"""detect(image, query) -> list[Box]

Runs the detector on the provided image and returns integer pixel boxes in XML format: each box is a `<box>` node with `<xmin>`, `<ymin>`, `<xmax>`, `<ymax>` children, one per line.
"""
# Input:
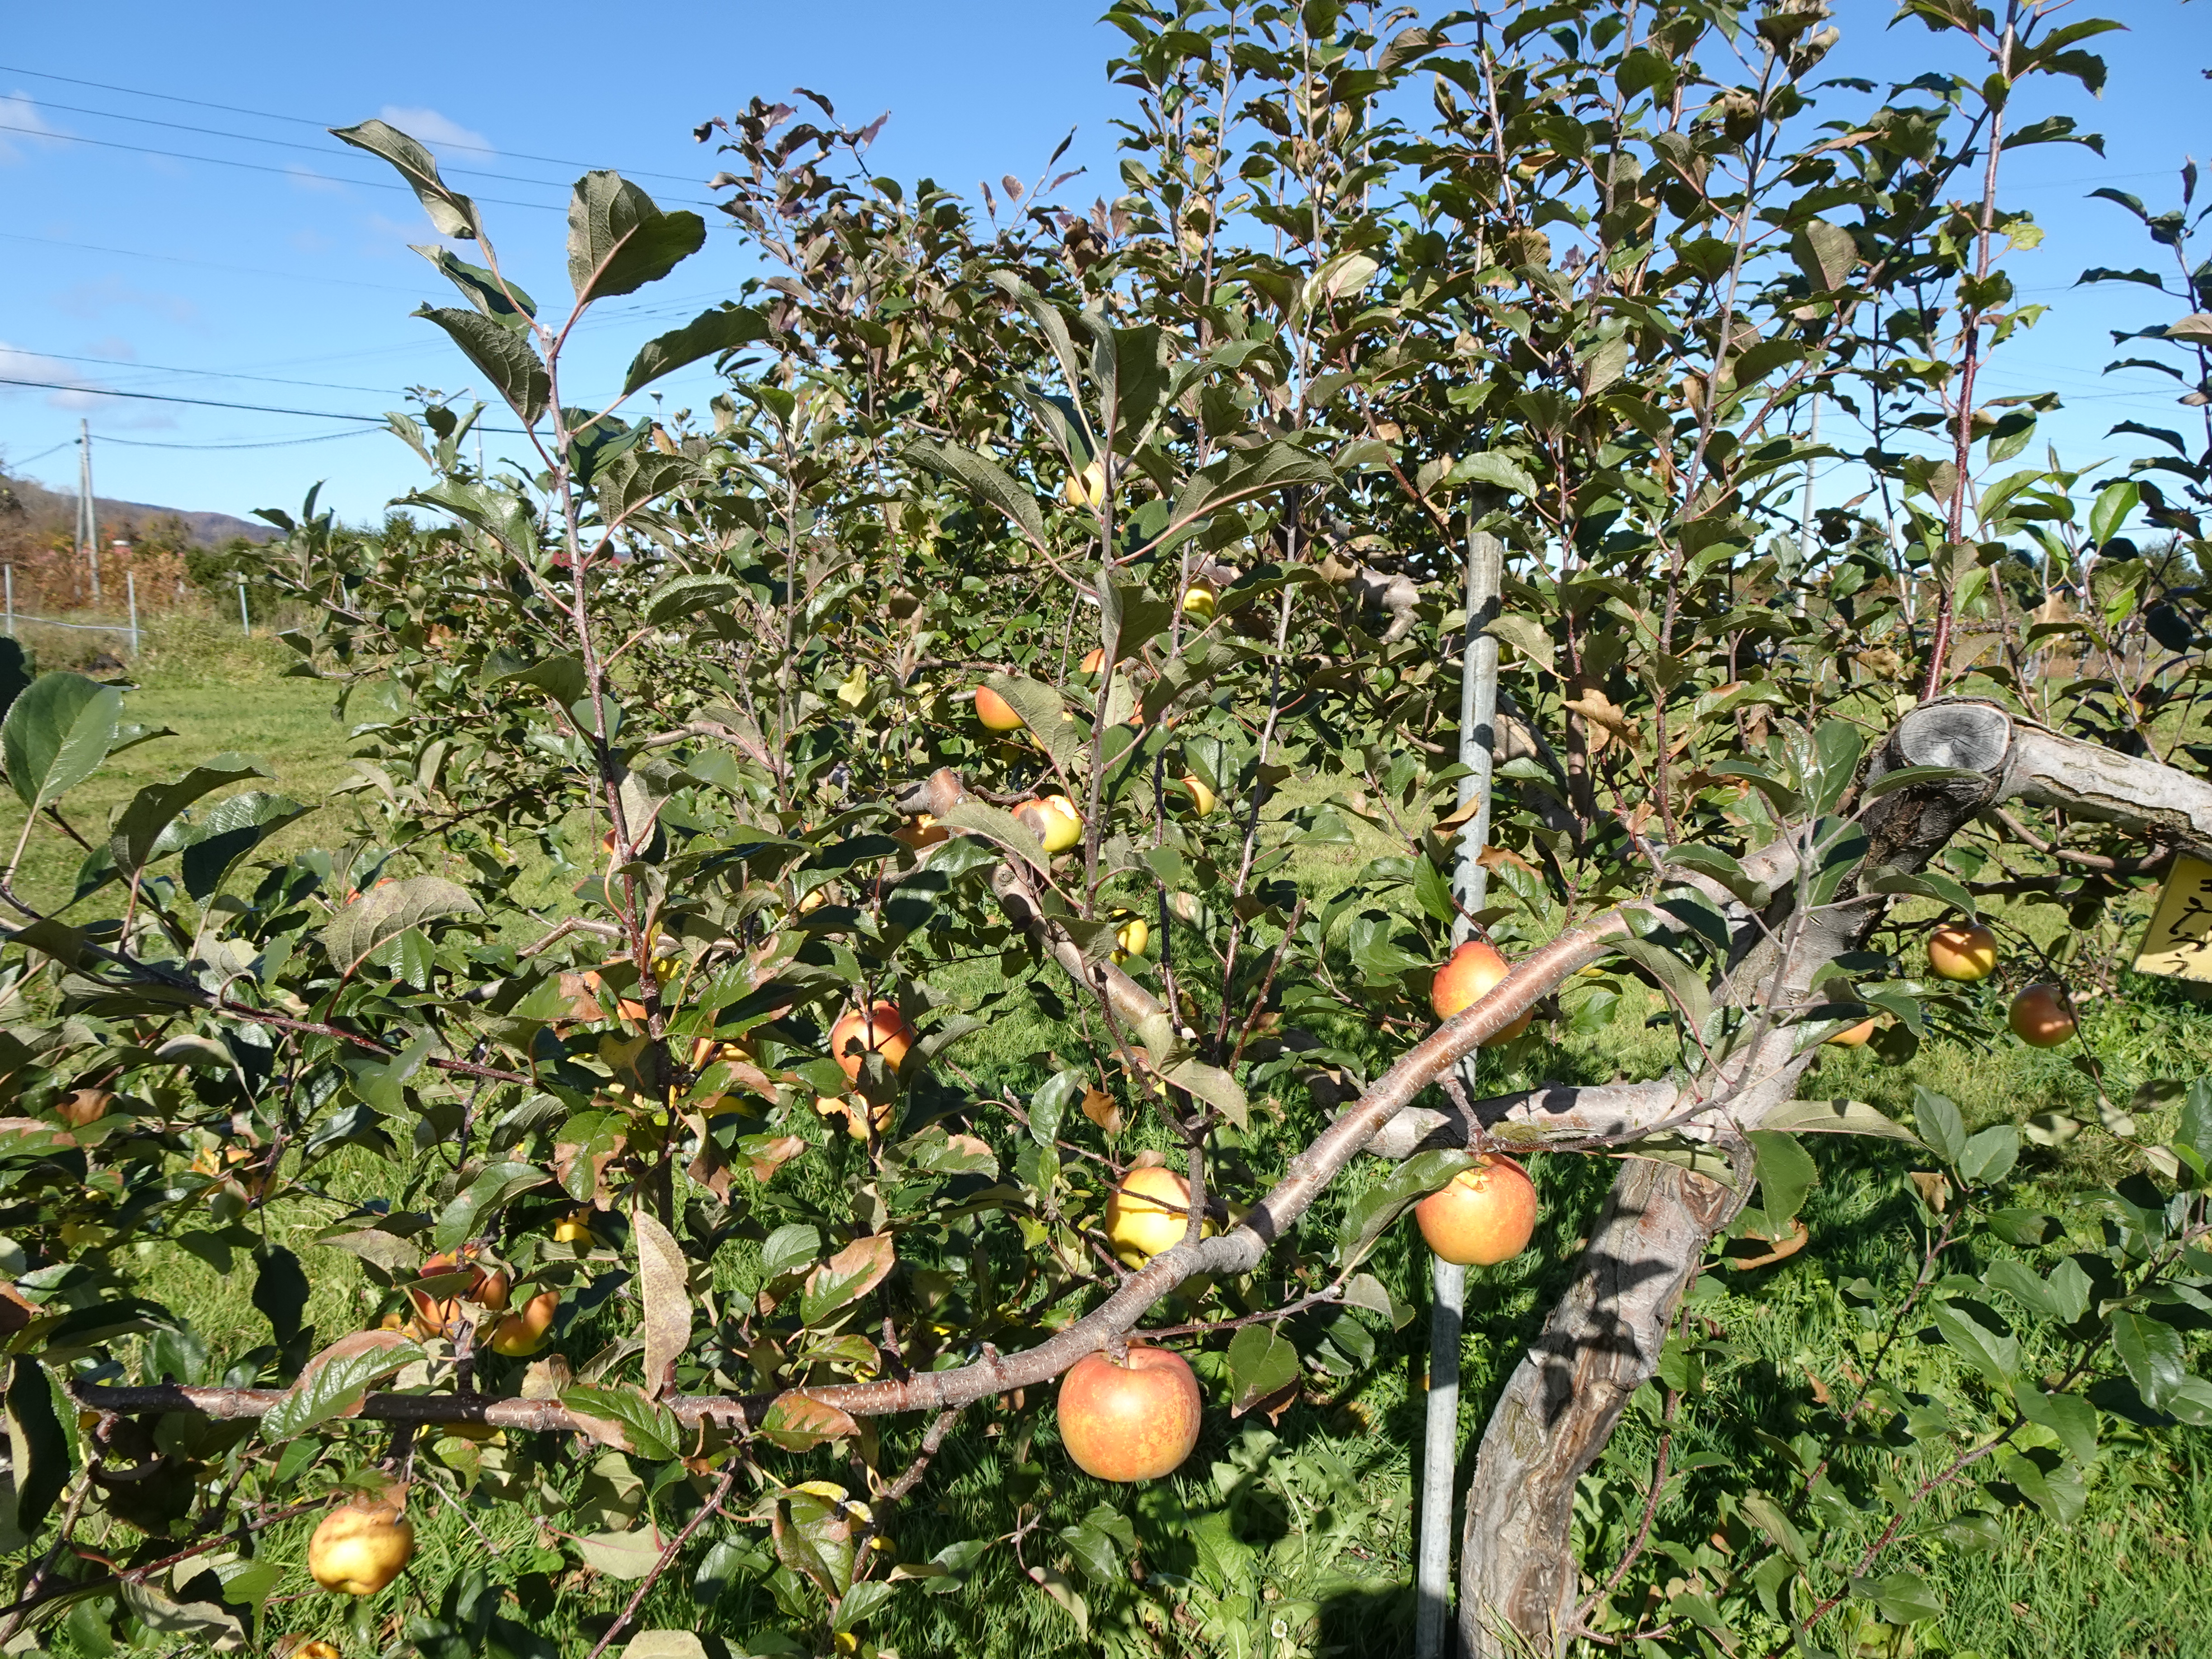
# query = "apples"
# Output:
<box><xmin>850</xmin><ymin>1091</ymin><xmax>897</xmax><ymax>1137</ymax></box>
<box><xmin>1103</xmin><ymin>1042</ymin><xmax>1160</xmax><ymax>1105</ymax></box>
<box><xmin>544</xmin><ymin>1194</ymin><xmax>600</xmax><ymax>1258</ymax></box>
<box><xmin>1928</xmin><ymin>920</ymin><xmax>1997</xmax><ymax>980</ymax></box>
<box><xmin>1095</xmin><ymin>907</ymin><xmax>1148</xmax><ymax>967</ymax></box>
<box><xmin>665</xmin><ymin>1076</ymin><xmax>721</xmax><ymax>1122</ymax></box>
<box><xmin>632</xmin><ymin>935</ymin><xmax>682</xmax><ymax>982</ymax></box>
<box><xmin>272</xmin><ymin>1634</ymin><xmax>339</xmax><ymax>1659</ymax></box>
<box><xmin>483</xmin><ymin>528</ymin><xmax>509</xmax><ymax>555</ymax></box>
<box><xmin>483</xmin><ymin>1279</ymin><xmax>566</xmax><ymax>1358</ymax></box>
<box><xmin>1169</xmin><ymin>772</ymin><xmax>1219</xmax><ymax>819</ymax></box>
<box><xmin>966</xmin><ymin>726</ymin><xmax>1020</xmax><ymax>767</ymax></box>
<box><xmin>803</xmin><ymin>1086</ymin><xmax>848</xmax><ymax>1139</ymax></box>
<box><xmin>834</xmin><ymin>1346</ymin><xmax>881</xmax><ymax>1384</ymax></box>
<box><xmin>802</xmin><ymin>821</ymin><xmax>818</xmax><ymax>836</ymax></box>
<box><xmin>1254</xmin><ymin>1007</ymin><xmax>1295</xmax><ymax>1045</ymax></box>
<box><xmin>187</xmin><ymin>1138</ymin><xmax>279</xmax><ymax>1215</ymax></box>
<box><xmin>1061</xmin><ymin>457</ymin><xmax>1124</xmax><ymax>519</ymax></box>
<box><xmin>1006</xmin><ymin>791</ymin><xmax>1084</xmax><ymax>858</ymax></box>
<box><xmin>1567</xmin><ymin>934</ymin><xmax>1609</xmax><ymax>979</ymax></box>
<box><xmin>1078</xmin><ymin>649</ymin><xmax>1129</xmax><ymax>696</ymax></box>
<box><xmin>796</xmin><ymin>874</ymin><xmax>839</xmax><ymax>913</ymax></box>
<box><xmin>583</xmin><ymin>960</ymin><xmax>640</xmax><ymax>1012</ymax></box>
<box><xmin>1531</xmin><ymin>482</ymin><xmax>1571</xmax><ymax>516</ymax></box>
<box><xmin>859</xmin><ymin>1533</ymin><xmax>899</xmax><ymax>1569</ymax></box>
<box><xmin>1117</xmin><ymin>521</ymin><xmax>1142</xmax><ymax>546</ymax></box>
<box><xmin>1428</xmin><ymin>940</ymin><xmax>1535</xmax><ymax>1045</ymax></box>
<box><xmin>1262</xmin><ymin>1575</ymin><xmax>1297</xmax><ymax>1607</ymax></box>
<box><xmin>1174</xmin><ymin>572</ymin><xmax>1223</xmax><ymax>618</ymax></box>
<box><xmin>379</xmin><ymin>1298</ymin><xmax>428</xmax><ymax>1353</ymax></box>
<box><xmin>974</xmin><ymin>666</ymin><xmax>1040</xmax><ymax>731</ymax></box>
<box><xmin>1030</xmin><ymin>708</ymin><xmax>1074</xmax><ymax>755</ymax></box>
<box><xmin>711</xmin><ymin>1023</ymin><xmax>760</xmax><ymax>1063</ymax></box>
<box><xmin>345</xmin><ymin>873</ymin><xmax>403</xmax><ymax>931</ymax></box>
<box><xmin>1129</xmin><ymin>703</ymin><xmax>1173</xmax><ymax>740</ymax></box>
<box><xmin>412</xmin><ymin>1239</ymin><xmax>507</xmax><ymax>1343</ymax></box>
<box><xmin>889</xmin><ymin>813</ymin><xmax>957</xmax><ymax>860</ymax></box>
<box><xmin>1809</xmin><ymin>987</ymin><xmax>1876</xmax><ymax>1049</ymax></box>
<box><xmin>1103</xmin><ymin>1164</ymin><xmax>1214</xmax><ymax>1284</ymax></box>
<box><xmin>1054</xmin><ymin>1346</ymin><xmax>1201</xmax><ymax>1482</ymax></box>
<box><xmin>308</xmin><ymin>1498</ymin><xmax>418</xmax><ymax>1597</ymax></box>
<box><xmin>508</xmin><ymin>1140</ymin><xmax>554</xmax><ymax>1183</ymax></box>
<box><xmin>1412</xmin><ymin>1146</ymin><xmax>1537</xmax><ymax>1269</ymax></box>
<box><xmin>831</xmin><ymin>999</ymin><xmax>920</xmax><ymax>1091</ymax></box>
<box><xmin>2008</xmin><ymin>984</ymin><xmax>2080</xmax><ymax>1048</ymax></box>
<box><xmin>602</xmin><ymin>825</ymin><xmax>646</xmax><ymax>869</ymax></box>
